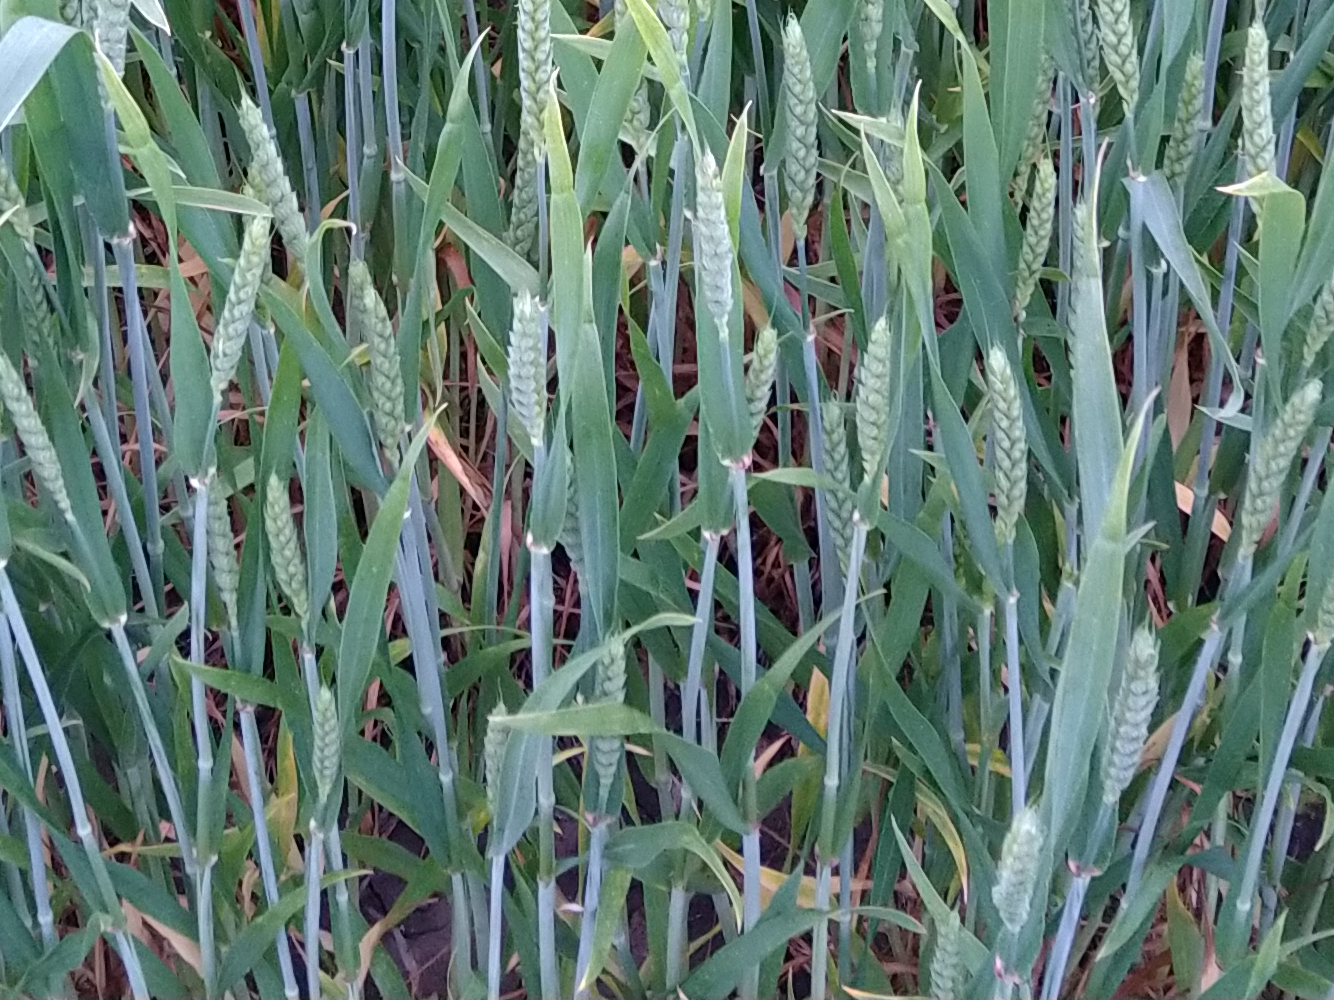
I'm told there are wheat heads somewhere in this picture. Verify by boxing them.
[1243,24,1274,179]
[240,188,274,328]
[207,475,238,611]
[995,812,1044,925]
[588,636,628,770]
[0,352,71,518]
[0,56,34,234]
[348,262,366,342]
[265,475,308,615]
[695,153,733,327]
[314,686,340,794]
[486,706,508,818]
[237,97,306,262]
[559,456,584,574]
[858,319,891,477]
[1010,52,1056,198]
[505,122,536,258]
[745,328,779,445]
[368,288,404,445]
[1069,0,1100,87]
[643,0,690,66]
[80,0,100,29]
[510,294,545,441]
[1238,382,1324,553]
[1094,0,1139,101]
[613,0,649,145]
[1302,195,1334,367]
[212,211,273,391]
[1014,159,1057,313]
[658,0,692,79]
[855,0,883,67]
[514,0,551,143]
[20,248,56,353]
[1164,54,1207,183]
[882,124,906,201]
[988,348,1027,534]
[1103,627,1162,798]
[821,403,854,570]
[1069,204,1090,369]
[1317,496,1334,647]
[783,15,818,221]
[94,0,136,77]
[930,911,964,999]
